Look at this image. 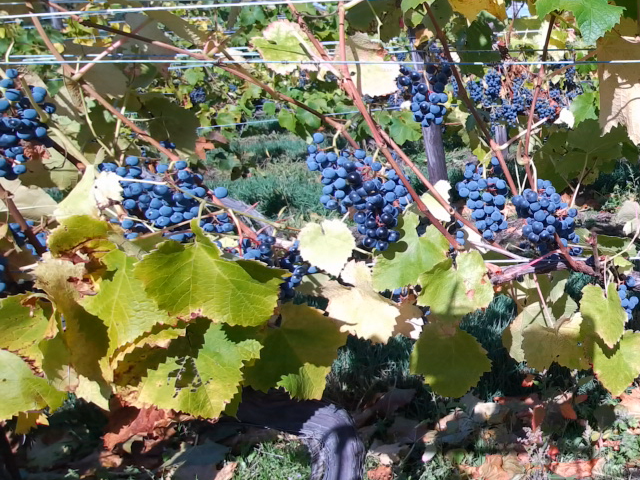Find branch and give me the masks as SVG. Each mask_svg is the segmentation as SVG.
Wrapping results in <instances>:
<instances>
[{
	"mask_svg": "<svg viewBox=\"0 0 640 480\" xmlns=\"http://www.w3.org/2000/svg\"><path fill=\"white\" fill-rule=\"evenodd\" d=\"M328 69L330 70V72L333 74V76L342 84V86L344 87V89L346 90V92L350 95V97L353 99L355 106L357 107L358 111L362 113V115L364 116V118L366 119L373 135H374V140L376 141V143L378 144V147L381 149L383 156L389 161V163L391 164V166L395 169L396 173L400 176L403 184L405 185V187L407 188V190L410 192L411 197L413 198V200L419 205V208L421 209V211L426 214V216L428 217V219L430 220V222L433 224V226L438 229L445 237L446 239L450 242V244L457 250L461 249V246L455 241V239L451 236V234L442 226L440 225L436 219L434 218V216L432 215V213L426 208V206L424 205V203L421 201V199L418 197V195L416 194L414 188L411 186V184L409 183L405 173L401 170V168L398 166V164L394 161V159L390 156V154L387 152V145L385 144V141L397 152V154L408 164V166L410 167V169L419 177V179L424 183V185L428 188V190L430 191V193L432 194V196L434 197V199L444 208L446 209L452 216H454L456 219H459L462 221V223H464L465 225H467L472 231H474L477 235H482V232H480L477 228H475L470 222L466 221L458 212L454 211L451 208V205L441 196L440 193H438L436 191V189L432 186V184L429 182V180L424 176V174L414 165V163L410 160V158L401 150V148L388 136V134L381 128L379 127L371 118V116L367 113L366 108L363 105V100L361 99V96L359 95L357 88L355 87L354 83L352 82L349 72L346 69L345 65H341V72L344 74V78L336 71L335 67L332 64L328 65Z\"/></svg>",
	"mask_w": 640,
	"mask_h": 480,
	"instance_id": "1",
	"label": "branch"
},
{
	"mask_svg": "<svg viewBox=\"0 0 640 480\" xmlns=\"http://www.w3.org/2000/svg\"><path fill=\"white\" fill-rule=\"evenodd\" d=\"M458 66L453 64L451 66V73L454 76L456 82V88L457 91L460 93L462 99L466 102L467 106L469 107L472 116L475 118V120L477 121V124L480 126V128L483 130L484 134L486 135L488 142L490 143V148L492 150H494L498 161H499V165H500V169L502 171V173L504 174V176L506 177L508 186H509V190L513 193V194H517L519 192V189L516 187V183L514 181V177L513 174L510 172L507 163H506V158L503 154V151L501 150V146L499 144H496L494 142V140L490 137V133L489 130L486 126V123L483 119V117L481 116V114L479 113L476 105H474L471 101V98L469 96V94L467 93V91L464 89V86L462 84V81L460 79V75L457 72Z\"/></svg>",
	"mask_w": 640,
	"mask_h": 480,
	"instance_id": "2",
	"label": "branch"
},
{
	"mask_svg": "<svg viewBox=\"0 0 640 480\" xmlns=\"http://www.w3.org/2000/svg\"><path fill=\"white\" fill-rule=\"evenodd\" d=\"M219 67H220V68H223V69H224V70H226V71H228L231 75H233V76H237V77H239V78H241V79H244V80H246V81H248V82H250V83H252V84H254V85H256V86L262 87V88H264V89L268 90L269 92H272L273 94H275V95H277V96H279V97H282V98L286 99L287 101H289V102H291V103H293V104L297 105L298 107L302 108L304 111H307L308 113H310V114H312V115H314V116L319 117L321 120H324L325 122L330 123V124H331V125H333V126H334L338 131H339V132H341V134H342L343 136H345V137L347 138V140H348L349 144H350L352 147H354V148H357V147H358V144L353 140V137L351 136V134H350L349 132H347V131L345 130V128H344V127H342V126H341V125H340L336 120H334L333 118H331V117H327V116H326V115H324L323 113H321V112H319V111H317V110H315V109H313V108H311V107H309V106H306L303 102H300L299 100H297V99H295V98H293V97L289 96L288 94H286V93H284V92H282V91H280V90H278V89H276V88H274V87H272V86H270V85H268V84H266V83H264V82H261V81H259V80H257V79L252 78L251 76H248V75H246V74H244V73H241V72H239V71L234 70V69H233L232 67H230L229 65H220Z\"/></svg>",
	"mask_w": 640,
	"mask_h": 480,
	"instance_id": "3",
	"label": "branch"
},
{
	"mask_svg": "<svg viewBox=\"0 0 640 480\" xmlns=\"http://www.w3.org/2000/svg\"><path fill=\"white\" fill-rule=\"evenodd\" d=\"M546 72L545 66H540L536 74V78L532 87V97L527 111V120L524 127V149L522 156V164L525 167L526 176L529 179L530 188L535 189V185L532 180L530 151H531V130L534 122V114L539 99L540 87L543 81L544 74Z\"/></svg>",
	"mask_w": 640,
	"mask_h": 480,
	"instance_id": "4",
	"label": "branch"
},
{
	"mask_svg": "<svg viewBox=\"0 0 640 480\" xmlns=\"http://www.w3.org/2000/svg\"><path fill=\"white\" fill-rule=\"evenodd\" d=\"M72 19L77 21L80 24L87 25V26H89L91 28H94L96 30H99V31L117 33V34L123 35V36H125L127 38H133L134 40H140V41H143V42H146V43H150V44L156 45L158 47H162V48H165V49H170V50H173V51L182 52L184 54H188V55L197 57V58H199L200 60H203V61H210L211 60L210 56H205V55H203V54H201V53H199L197 51H193L191 49H186L184 47H180V46H176V45L160 42L158 40H155V39H152V38H148V37L142 36V35H137L135 33H129L127 31L121 30L119 28L101 26V25H99L97 23H94L92 21L85 20V19L81 18L80 16L72 17Z\"/></svg>",
	"mask_w": 640,
	"mask_h": 480,
	"instance_id": "5",
	"label": "branch"
},
{
	"mask_svg": "<svg viewBox=\"0 0 640 480\" xmlns=\"http://www.w3.org/2000/svg\"><path fill=\"white\" fill-rule=\"evenodd\" d=\"M79 84L83 87L85 91L97 102L102 104L110 113H112L118 120H120L125 126L136 132L139 136L143 137L153 148H157L163 155L168 157L171 160H175L177 162L179 157L173 155L171 152L167 151L164 147H162L159 143H155L150 135H147L146 132L140 130L137 126L133 125L124 116L120 115L106 100L102 97L98 96L83 79L79 80Z\"/></svg>",
	"mask_w": 640,
	"mask_h": 480,
	"instance_id": "6",
	"label": "branch"
},
{
	"mask_svg": "<svg viewBox=\"0 0 640 480\" xmlns=\"http://www.w3.org/2000/svg\"><path fill=\"white\" fill-rule=\"evenodd\" d=\"M0 198L3 203L8 207L10 214L15 219L18 225L22 228L26 237H30L31 241L35 244L37 249L42 253H46V249L42 246V244L35 237L34 233L31 231L29 225L26 223L25 219L22 217L15 199L13 195L10 193L8 189H6L2 183H0Z\"/></svg>",
	"mask_w": 640,
	"mask_h": 480,
	"instance_id": "7",
	"label": "branch"
},
{
	"mask_svg": "<svg viewBox=\"0 0 640 480\" xmlns=\"http://www.w3.org/2000/svg\"><path fill=\"white\" fill-rule=\"evenodd\" d=\"M423 9L425 11V13L427 14V17L429 18V21L431 23L432 29L436 35V38L438 39L440 46L442 48L443 54L446 57V59H454L449 45L447 43V40L445 39L443 32L439 26V23L435 17L434 12L432 11V8L430 7V3L428 1H425L423 3Z\"/></svg>",
	"mask_w": 640,
	"mask_h": 480,
	"instance_id": "8",
	"label": "branch"
},
{
	"mask_svg": "<svg viewBox=\"0 0 640 480\" xmlns=\"http://www.w3.org/2000/svg\"><path fill=\"white\" fill-rule=\"evenodd\" d=\"M557 17H558V12L556 10H553L550 14L548 25L545 29L544 36H543V51L541 56V59L543 61H547L549 59L550 39H551V34L553 32V29L555 27V23L557 21Z\"/></svg>",
	"mask_w": 640,
	"mask_h": 480,
	"instance_id": "9",
	"label": "branch"
},
{
	"mask_svg": "<svg viewBox=\"0 0 640 480\" xmlns=\"http://www.w3.org/2000/svg\"><path fill=\"white\" fill-rule=\"evenodd\" d=\"M288 9L295 15L296 19L299 21L300 25L303 28L304 33L307 35L313 46L317 49L322 59H329V57L325 54L321 45L318 43L316 38L313 36L312 32L309 30L308 25L305 23L304 19L300 15V12L296 9L295 6H288Z\"/></svg>",
	"mask_w": 640,
	"mask_h": 480,
	"instance_id": "10",
	"label": "branch"
},
{
	"mask_svg": "<svg viewBox=\"0 0 640 480\" xmlns=\"http://www.w3.org/2000/svg\"><path fill=\"white\" fill-rule=\"evenodd\" d=\"M44 140L49 144L52 145L53 147H55L63 156H65L67 159H69V161L76 166L78 169H80L81 171L85 170V167L83 164H81L80 162H78L70 153H68L62 146H60L59 143H57L56 141L52 140L50 137L45 136Z\"/></svg>",
	"mask_w": 640,
	"mask_h": 480,
	"instance_id": "11",
	"label": "branch"
},
{
	"mask_svg": "<svg viewBox=\"0 0 640 480\" xmlns=\"http://www.w3.org/2000/svg\"><path fill=\"white\" fill-rule=\"evenodd\" d=\"M31 20L34 22L35 25V29L38 32L39 36L41 37L42 41L46 44V46L48 47V49L52 52V54L58 59V60H63L62 55L56 50V48L52 45V43L50 42V40L46 37L45 33L43 32L39 20L37 17L31 18Z\"/></svg>",
	"mask_w": 640,
	"mask_h": 480,
	"instance_id": "12",
	"label": "branch"
},
{
	"mask_svg": "<svg viewBox=\"0 0 640 480\" xmlns=\"http://www.w3.org/2000/svg\"><path fill=\"white\" fill-rule=\"evenodd\" d=\"M238 224H239V226L241 227V229H242L245 233H247V234H248V236L250 237L251 241H252L253 243H256V242H257V238H256V236H255V235H254V233H253V232H252V231H251V230H250V229H249V228H248V227L243 223V221H242V220H239V221H238Z\"/></svg>",
	"mask_w": 640,
	"mask_h": 480,
	"instance_id": "13",
	"label": "branch"
},
{
	"mask_svg": "<svg viewBox=\"0 0 640 480\" xmlns=\"http://www.w3.org/2000/svg\"><path fill=\"white\" fill-rule=\"evenodd\" d=\"M42 2H43L44 4H46L47 6H50V7L55 8L58 12H65V11H66V8H65V7H61V6H60V5H58L57 3L52 2V1H50V0H42Z\"/></svg>",
	"mask_w": 640,
	"mask_h": 480,
	"instance_id": "14",
	"label": "branch"
},
{
	"mask_svg": "<svg viewBox=\"0 0 640 480\" xmlns=\"http://www.w3.org/2000/svg\"><path fill=\"white\" fill-rule=\"evenodd\" d=\"M205 192L215 204H217L219 206L223 205V202L221 200L217 199V197L214 195V193L209 188H206Z\"/></svg>",
	"mask_w": 640,
	"mask_h": 480,
	"instance_id": "15",
	"label": "branch"
},
{
	"mask_svg": "<svg viewBox=\"0 0 640 480\" xmlns=\"http://www.w3.org/2000/svg\"><path fill=\"white\" fill-rule=\"evenodd\" d=\"M489 244L493 245V247L499 248L500 250H505V247L501 246L500 244H498L495 241H489Z\"/></svg>",
	"mask_w": 640,
	"mask_h": 480,
	"instance_id": "16",
	"label": "branch"
}]
</instances>
